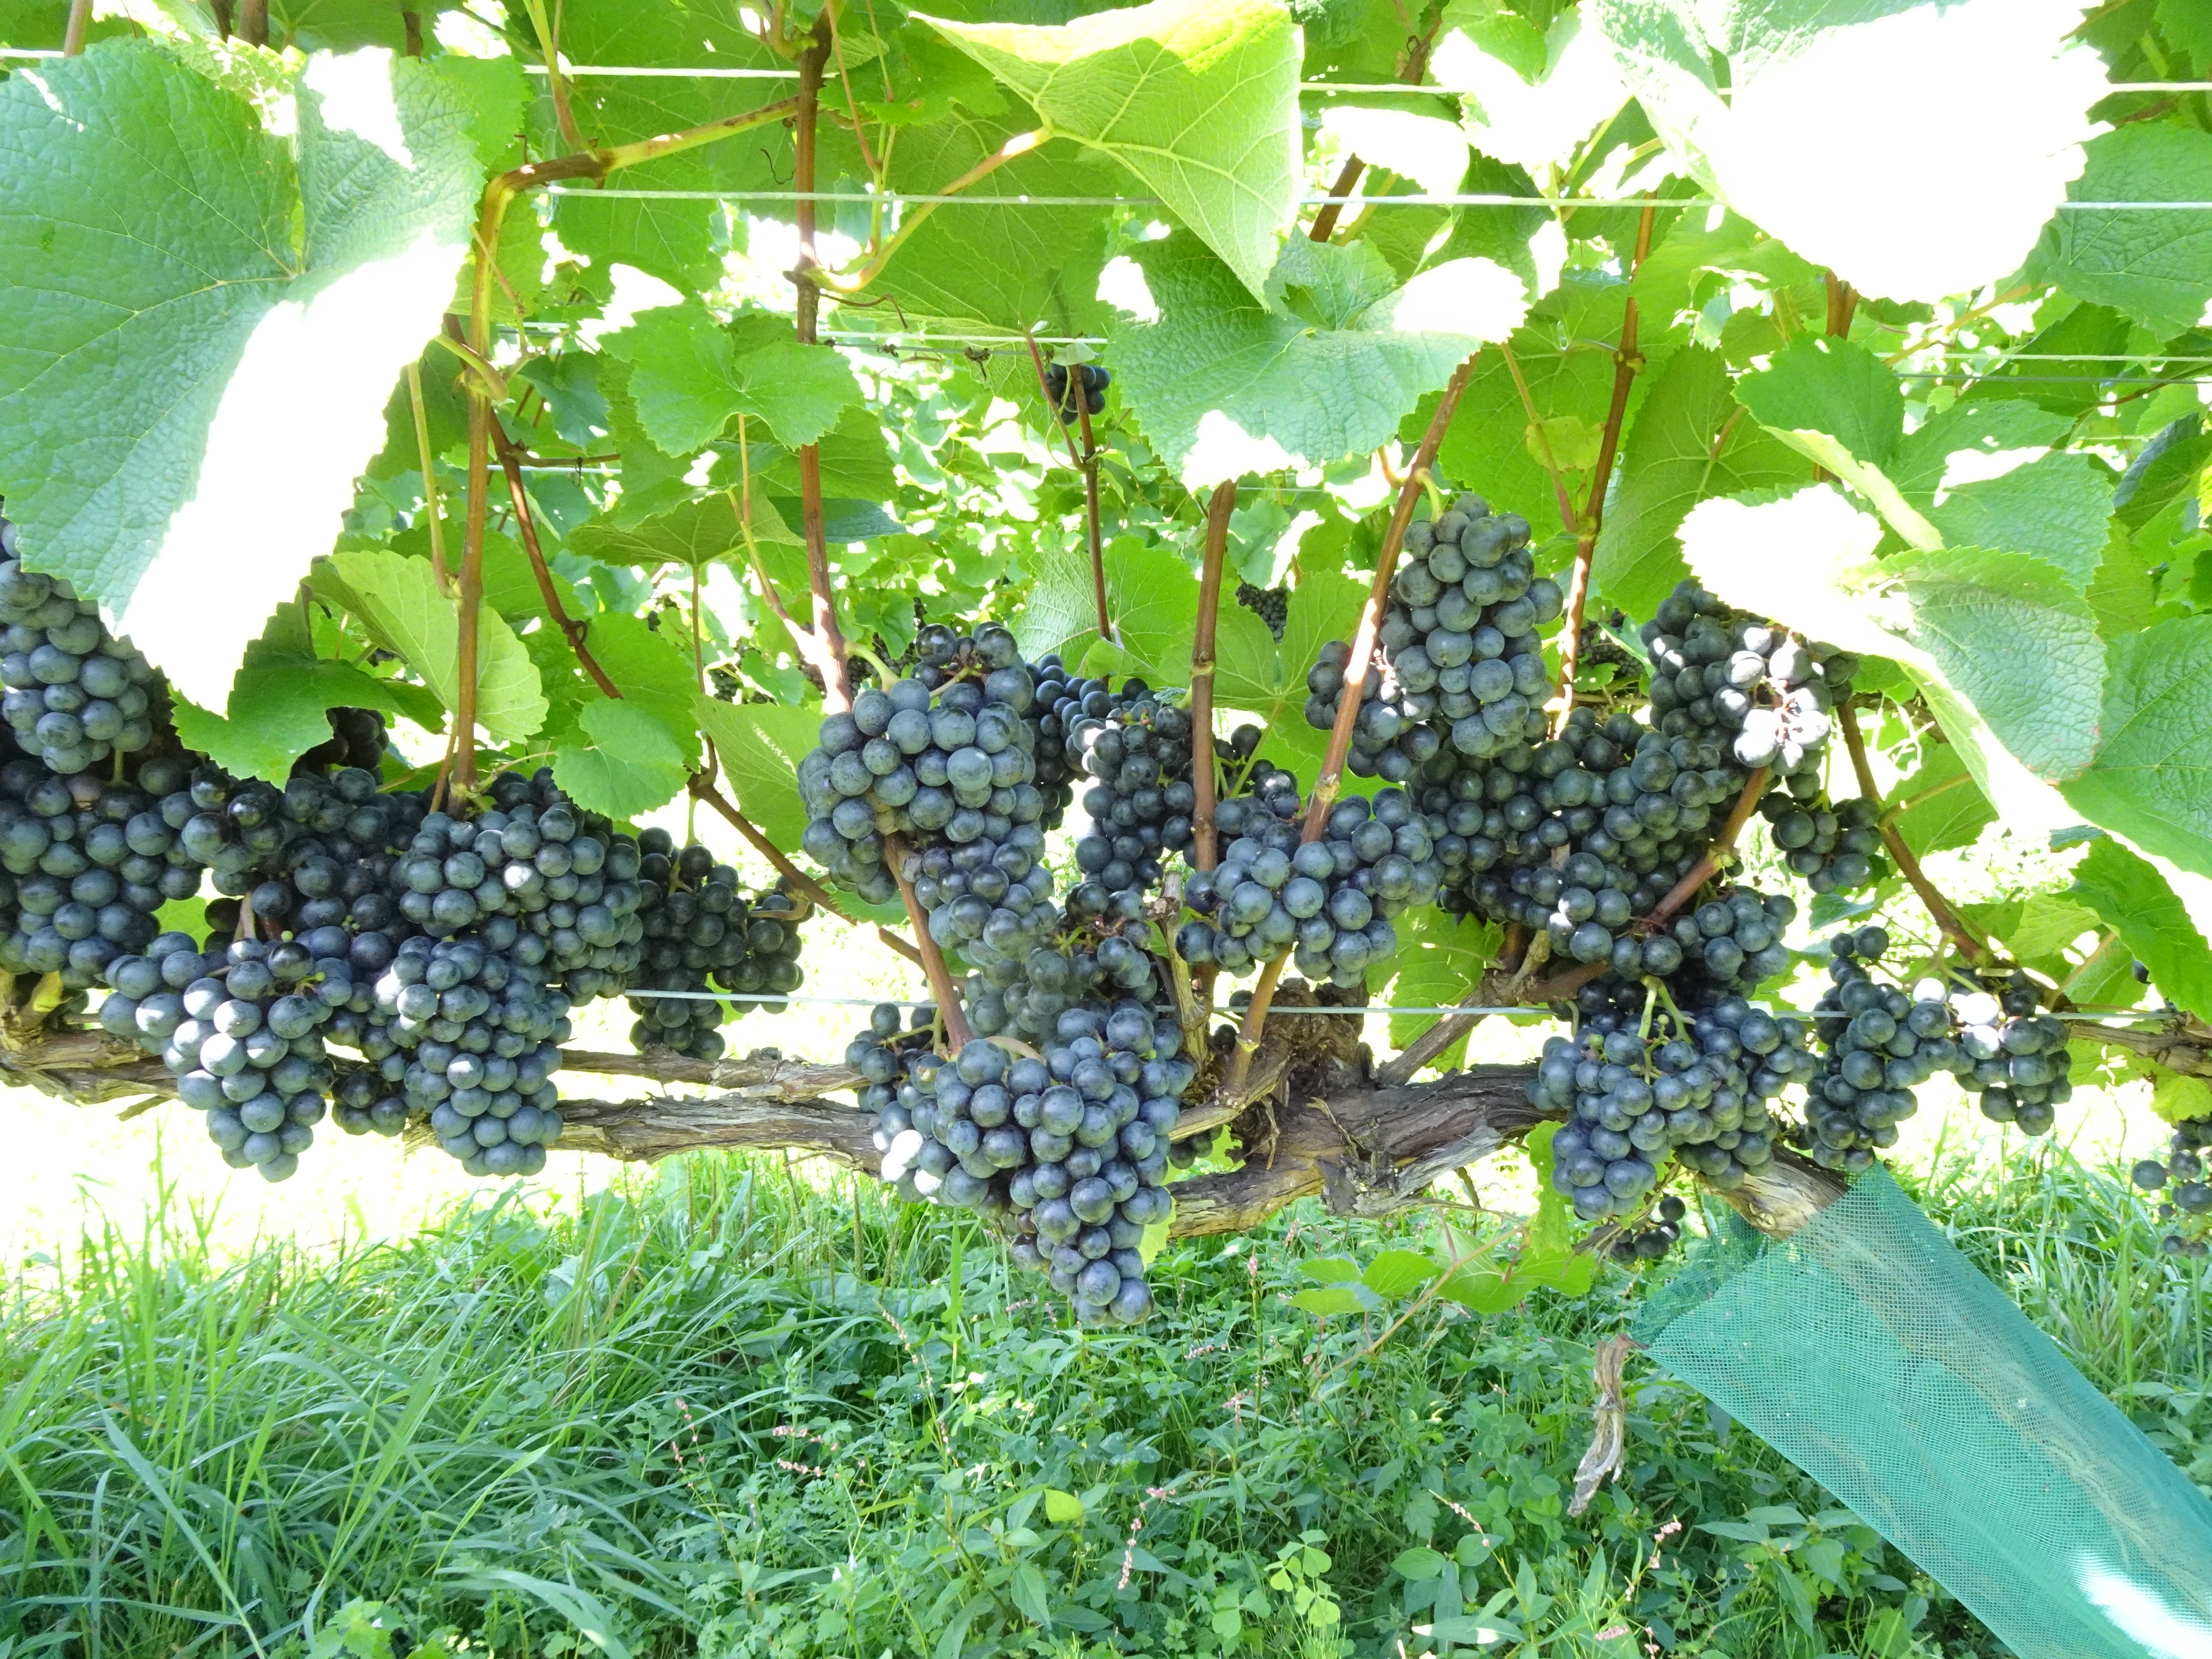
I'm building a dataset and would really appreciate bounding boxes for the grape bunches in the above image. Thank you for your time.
[704,874,813,1014]
[610,826,737,1062]
[99,931,353,1183]
[2131,958,2151,985]
[291,708,389,786]
[1166,722,1294,871]
[796,622,1059,971]
[1374,493,1562,754]
[1790,927,1956,1173]
[1762,771,1882,895]
[1303,640,1439,779]
[1954,980,2074,1135]
[1676,986,1816,1191]
[5,499,176,773]
[1077,671,1215,894]
[1534,1008,1721,1222]
[180,764,452,1135]
[1609,1194,1687,1263]
[846,885,1212,1328]
[364,934,571,1176]
[2134,1114,2212,1256]
[390,768,644,1006]
[1021,654,1107,835]
[1173,787,1439,989]
[1673,885,1797,984]
[1412,705,1713,1012]
[1629,577,1831,833]
[0,758,202,1012]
